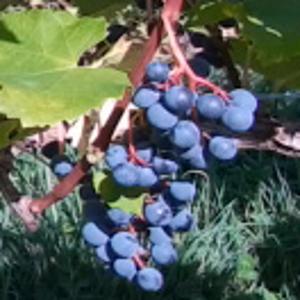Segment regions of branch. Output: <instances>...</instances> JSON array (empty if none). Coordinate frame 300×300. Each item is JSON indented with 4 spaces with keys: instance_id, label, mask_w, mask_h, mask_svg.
Returning a JSON list of instances; mask_svg holds the SVG:
<instances>
[{
    "instance_id": "obj_1",
    "label": "branch",
    "mask_w": 300,
    "mask_h": 300,
    "mask_svg": "<svg viewBox=\"0 0 300 300\" xmlns=\"http://www.w3.org/2000/svg\"><path fill=\"white\" fill-rule=\"evenodd\" d=\"M131 101L132 96L129 93H123L119 97L117 105L100 127L98 137L90 147L89 151L80 158L71 174L59 185L58 188L49 194L39 197L30 205V210L33 213H39L42 209L60 201L80 181L89 166L99 157L104 147L107 145L111 131L121 120L129 108Z\"/></svg>"
},
{
    "instance_id": "obj_2",
    "label": "branch",
    "mask_w": 300,
    "mask_h": 300,
    "mask_svg": "<svg viewBox=\"0 0 300 300\" xmlns=\"http://www.w3.org/2000/svg\"><path fill=\"white\" fill-rule=\"evenodd\" d=\"M182 0H168L166 5L159 13V18L156 22L154 31L150 34L145 46L137 55L135 62L132 66L130 81L133 84H138L142 80V74L146 63L156 51L158 44L163 38H167L164 30L162 19L167 17L170 21L171 27L177 18V14L181 9Z\"/></svg>"
}]
</instances>
